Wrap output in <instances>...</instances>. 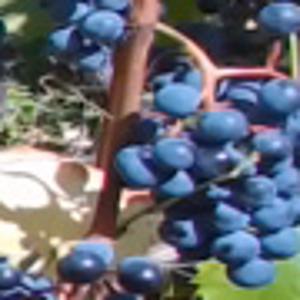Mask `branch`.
Masks as SVG:
<instances>
[{"label": "branch", "mask_w": 300, "mask_h": 300, "mask_svg": "<svg viewBox=\"0 0 300 300\" xmlns=\"http://www.w3.org/2000/svg\"><path fill=\"white\" fill-rule=\"evenodd\" d=\"M134 17L129 21L116 51L111 56L113 72L102 136L94 152L96 166L106 178L87 226L89 235L110 239L116 233L123 184L113 165L114 156L135 140L145 105L146 82L155 41L156 24L164 12L162 0H134Z\"/></svg>", "instance_id": "30e6481e"}]
</instances>
